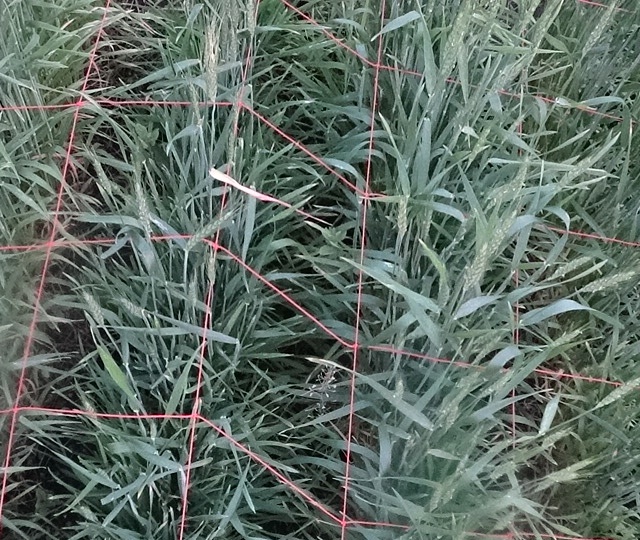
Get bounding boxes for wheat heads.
[424,0,437,19]
[488,176,527,208]
[443,486,455,504]
[188,281,197,308]
[527,7,558,55]
[96,466,114,481]
[457,454,467,472]
[437,279,450,306]
[231,105,241,128]
[481,371,513,400]
[471,126,494,166]
[424,199,436,237]
[188,84,201,117]
[397,198,409,238]
[457,369,485,385]
[501,114,524,143]
[541,430,565,442]
[395,377,405,400]
[247,0,254,33]
[442,5,469,57]
[492,462,515,479]
[228,128,240,164]
[429,487,443,509]
[495,512,514,535]
[440,33,463,81]
[480,4,500,44]
[549,331,582,344]
[231,0,238,21]
[548,472,579,482]
[456,208,476,246]
[206,55,216,99]
[82,401,97,418]
[208,256,218,285]
[509,157,529,200]
[94,161,108,191]
[583,270,635,293]
[486,65,520,103]
[84,291,104,323]
[464,253,489,286]
[149,421,156,439]
[556,158,595,188]
[118,296,144,318]
[521,0,544,28]
[490,212,517,254]
[473,335,500,363]
[444,403,460,426]
[190,210,235,252]
[229,35,238,62]
[595,376,637,404]
[80,503,99,524]
[551,256,594,282]
[134,191,151,233]
[583,1,617,60]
